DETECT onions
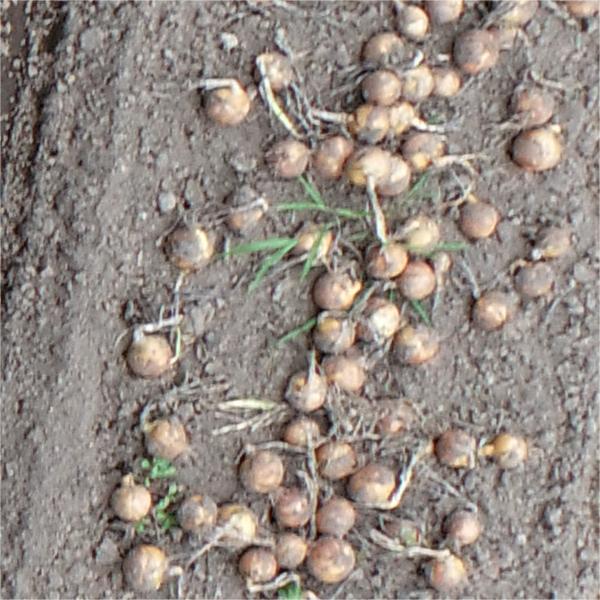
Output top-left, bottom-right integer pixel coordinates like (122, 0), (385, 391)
(161, 225), (211, 269)
(495, 0), (534, 27)
(374, 399), (417, 439)
(424, 551), (468, 592)
(511, 123), (561, 168)
(435, 426), (476, 467)
(315, 135), (351, 178)
(203, 78), (246, 125)
(274, 530), (310, 569)
(456, 200), (497, 238)
(362, 32), (418, 70)
(121, 544), (169, 588)
(398, 212), (438, 251)
(283, 414), (323, 446)
(425, 0), (459, 27)
(110, 482), (150, 521)
(316, 438), (357, 479)
(531, 225), (571, 263)
(513, 84), (553, 125)
(313, 270), (360, 310)
(348, 461), (401, 506)
(433, 66), (461, 96)
(402, 130), (444, 168)
(353, 103), (392, 141)
(393, 324), (436, 365)
(453, 29), (500, 74)
(361, 69), (400, 105)
(372, 157), (411, 196)
(511, 262), (554, 299)
(315, 312), (352, 351)
(386, 103), (417, 133)
(284, 368), (326, 411)
(470, 290), (511, 330)
(428, 252), (451, 276)
(565, 0), (600, 18)
(317, 497), (354, 534)
(270, 483), (312, 525)
(255, 52), (294, 90)
(227, 193), (265, 231)
(176, 493), (214, 533)
(482, 428), (523, 466)
(308, 537), (353, 585)
(238, 546), (276, 582)
(270, 138), (307, 178)
(127, 331), (172, 377)
(239, 453), (286, 494)
(395, 4), (428, 39)
(348, 148), (390, 183)
(364, 300), (402, 341)
(396, 258), (435, 299)
(365, 240), (406, 279)
(291, 223), (328, 261)
(327, 354), (366, 392)
(445, 507), (481, 544)
(144, 418), (189, 461)
(402, 69), (432, 101)
(218, 504), (259, 545)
